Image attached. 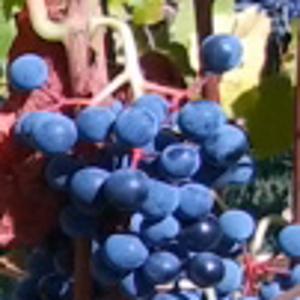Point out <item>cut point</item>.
<instances>
[{
	"label": "cut point",
	"instance_id": "7d7e1d6f",
	"mask_svg": "<svg viewBox=\"0 0 300 300\" xmlns=\"http://www.w3.org/2000/svg\"><path fill=\"white\" fill-rule=\"evenodd\" d=\"M271 223H277L281 225H287L289 220L278 215H268L265 218H262L259 222L256 234L250 244V250L253 252H259L262 248V240L265 236V233L269 229Z\"/></svg>",
	"mask_w": 300,
	"mask_h": 300
},
{
	"label": "cut point",
	"instance_id": "6a23745f",
	"mask_svg": "<svg viewBox=\"0 0 300 300\" xmlns=\"http://www.w3.org/2000/svg\"><path fill=\"white\" fill-rule=\"evenodd\" d=\"M94 23L99 26L112 25L116 27L125 40V71L121 72L116 79L110 84L103 87L93 97L95 104H101L104 99L112 93L117 92L120 86H123L129 79L131 86L134 88V94L137 98L144 96V89L164 93L171 98L179 100L183 104L190 102V97L185 91L175 89L169 84L155 82L153 80H141V72L139 71L137 53L132 32L123 20H117L110 17H97Z\"/></svg>",
	"mask_w": 300,
	"mask_h": 300
}]
</instances>
